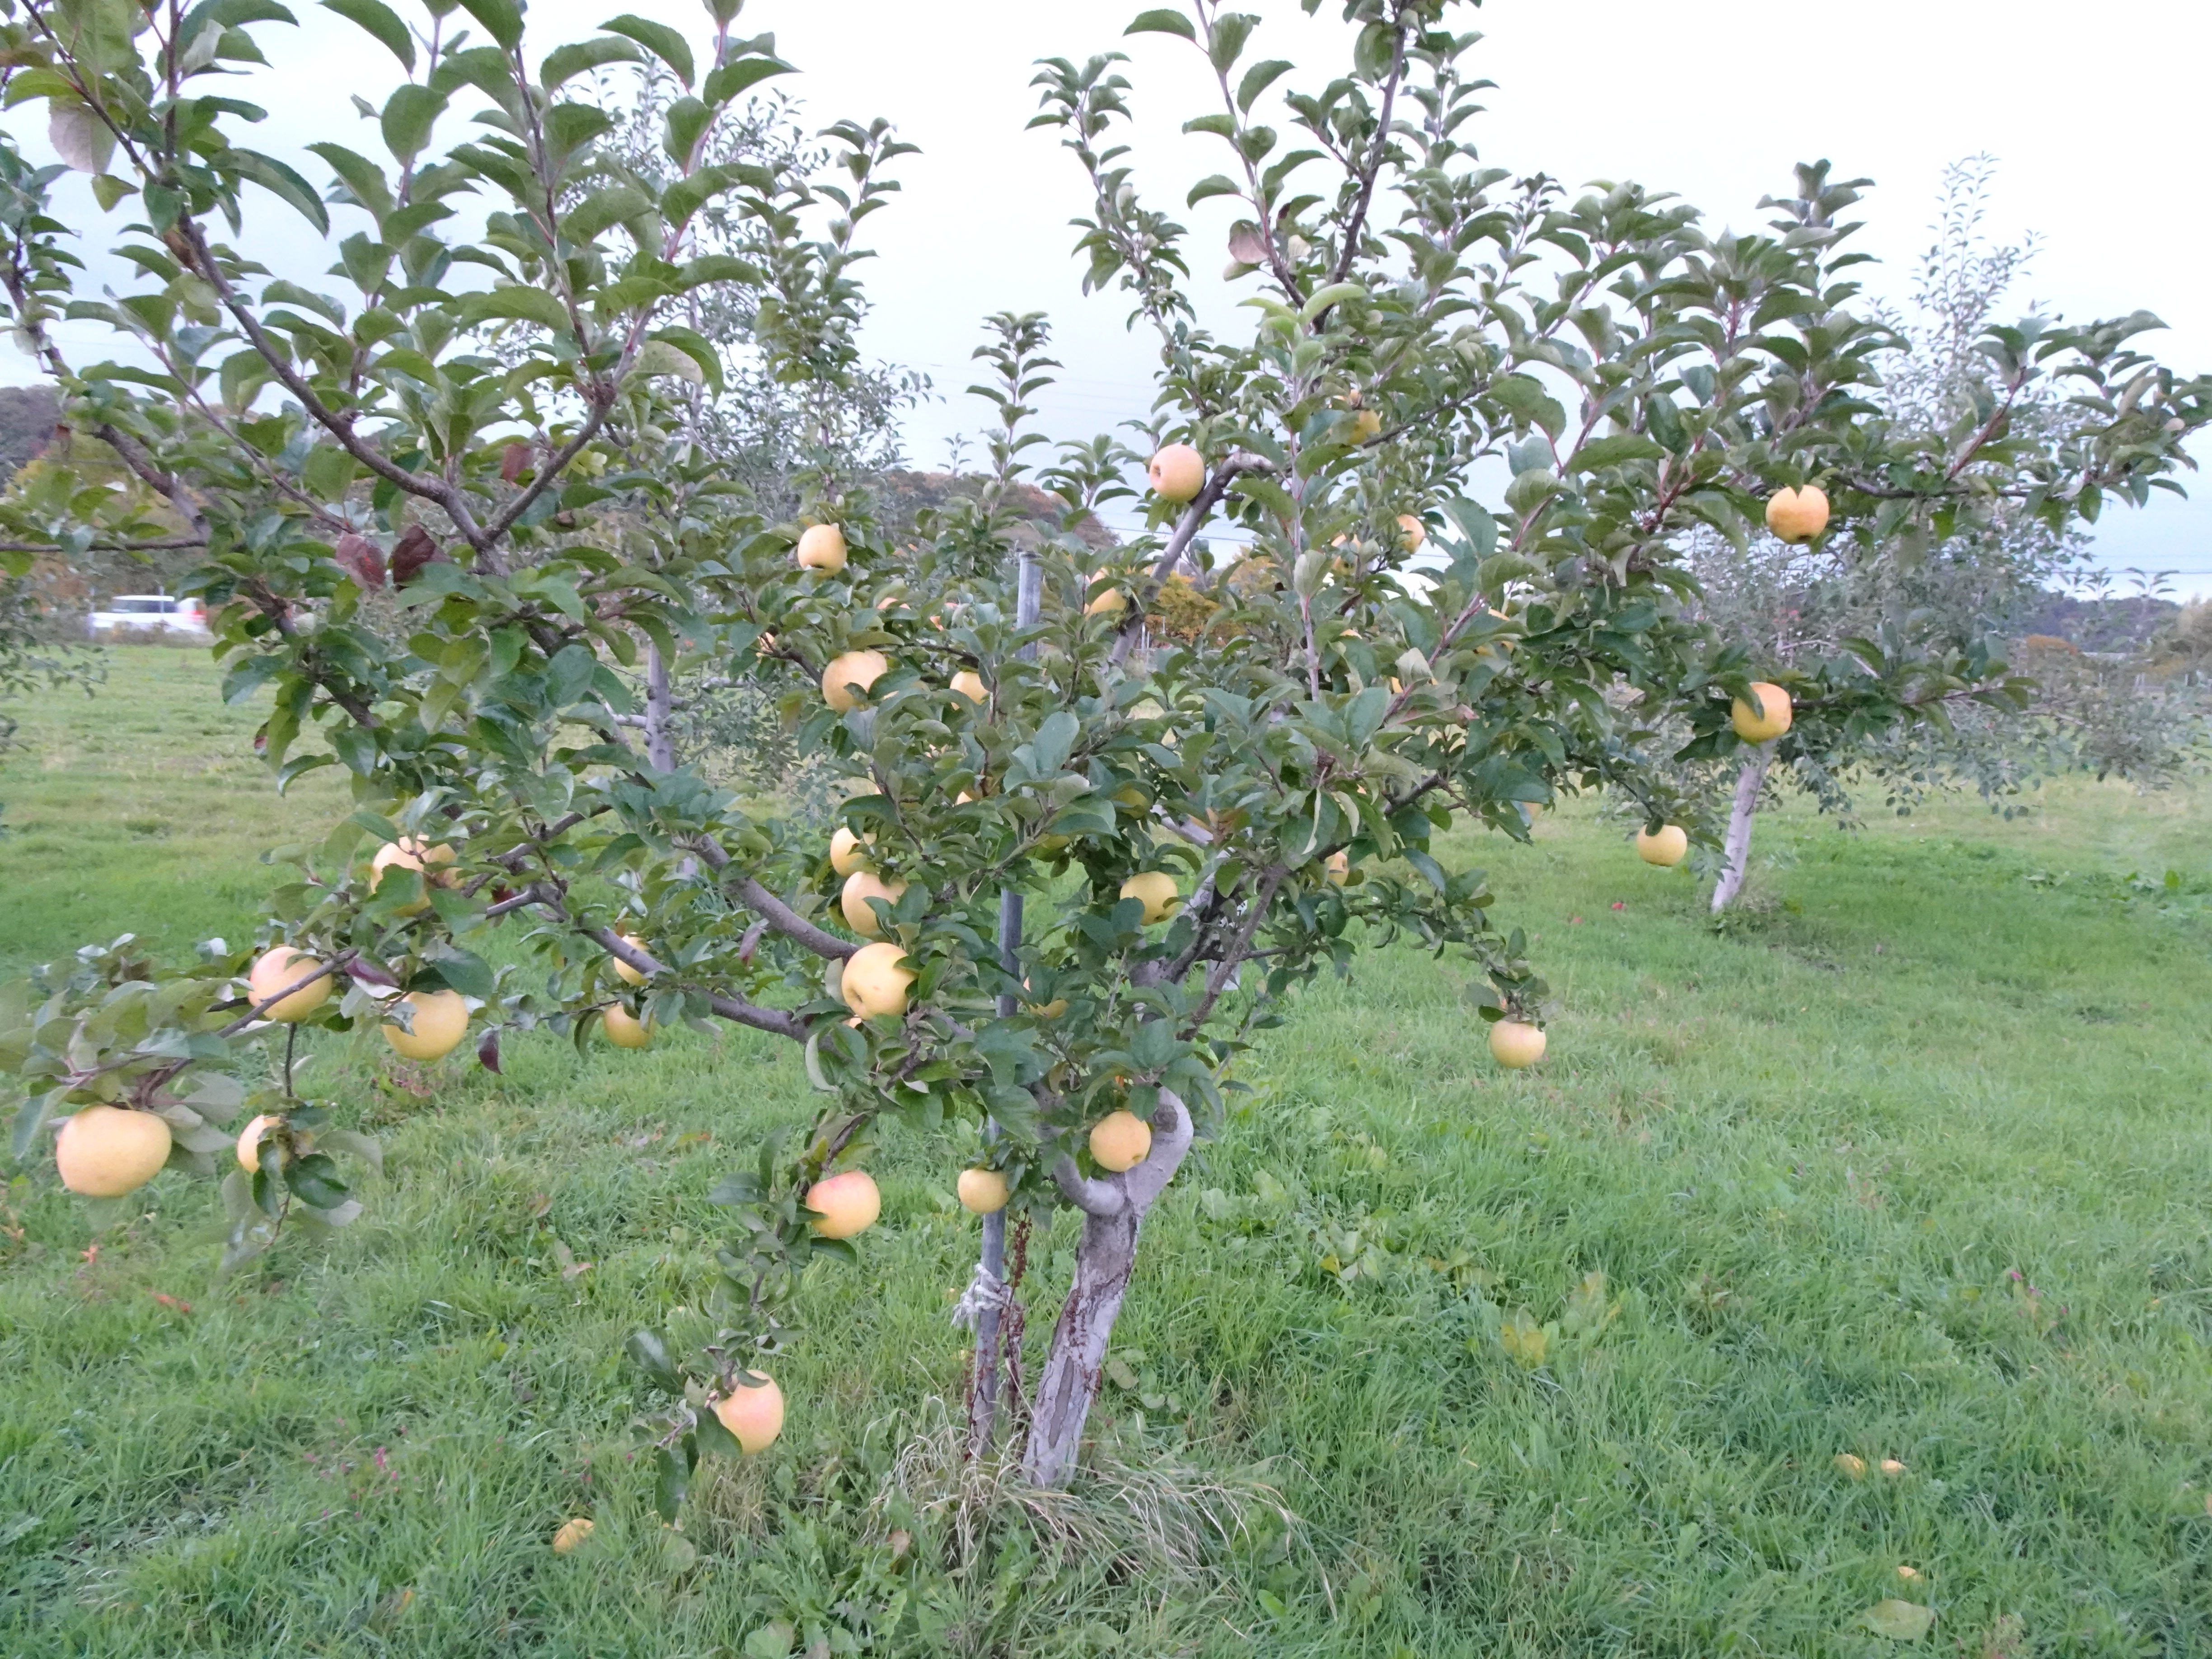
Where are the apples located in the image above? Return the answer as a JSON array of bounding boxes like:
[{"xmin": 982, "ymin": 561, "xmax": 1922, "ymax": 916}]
[
  {"xmin": 1464, "ymin": 606, "xmax": 1526, "ymax": 660},
  {"xmin": 820, "ymin": 647, "xmax": 891, "ymax": 716},
  {"xmin": 1388, "ymin": 673, "xmax": 1443, "ymax": 716},
  {"xmin": 699, "ymin": 1366, "xmax": 786, "ymax": 1454},
  {"xmin": 1089, "ymin": 569, "xmax": 1145, "ymax": 621},
  {"xmin": 1327, "ymin": 629, "xmax": 1363, "ymax": 672},
  {"xmin": 874, "ymin": 594, "xmax": 915, "ymax": 634},
  {"xmin": 842, "ymin": 869, "xmax": 912, "ymax": 940},
  {"xmin": 247, "ymin": 945, "xmax": 335, "ymax": 1025},
  {"xmin": 1019, "ymin": 965, "xmax": 1077, "ymax": 1023},
  {"xmin": 1108, "ymin": 777, "xmax": 1152, "ymax": 819},
  {"xmin": 1118, "ymin": 870, "xmax": 1178, "ymax": 929},
  {"xmin": 1489, "ymin": 1012, "xmax": 1548, "ymax": 1069},
  {"xmin": 1767, "ymin": 483, "xmax": 1831, "ymax": 544},
  {"xmin": 947, "ymin": 667, "xmax": 996, "ymax": 717},
  {"xmin": 1186, "ymin": 785, "xmax": 1229, "ymax": 834},
  {"xmin": 1328, "ymin": 532, "xmax": 1375, "ymax": 575},
  {"xmin": 955, "ymin": 1167, "xmax": 1016, "ymax": 1215},
  {"xmin": 1501, "ymin": 994, "xmax": 1530, "ymax": 1023},
  {"xmin": 919, "ymin": 601, "xmax": 973, "ymax": 652},
  {"xmin": 1089, "ymin": 1106, "xmax": 1154, "ymax": 1175},
  {"xmin": 830, "ymin": 824, "xmax": 896, "ymax": 879},
  {"xmin": 957, "ymin": 786, "xmax": 996, "ymax": 825},
  {"xmin": 796, "ymin": 523, "xmax": 848, "ymax": 578},
  {"xmin": 1035, "ymin": 811, "xmax": 1081, "ymax": 853},
  {"xmin": 1515, "ymin": 789, "xmax": 1546, "ymax": 821},
  {"xmin": 1635, "ymin": 821, "xmax": 1688, "ymax": 870},
  {"xmin": 370, "ymin": 833, "xmax": 466, "ymax": 919},
  {"xmin": 876, "ymin": 690, "xmax": 923, "ymax": 734},
  {"xmin": 840, "ymin": 943, "xmax": 929, "ymax": 1027},
  {"xmin": 749, "ymin": 622, "xmax": 784, "ymax": 662},
  {"xmin": 1324, "ymin": 392, "xmax": 1380, "ymax": 446},
  {"xmin": 1380, "ymin": 511, "xmax": 1425, "ymax": 557},
  {"xmin": 803, "ymin": 1169, "xmax": 885, "ymax": 1243},
  {"xmin": 611, "ymin": 928, "xmax": 662, "ymax": 986},
  {"xmin": 1148, "ymin": 441, "xmax": 1208, "ymax": 505},
  {"xmin": 1334, "ymin": 782, "xmax": 1368, "ymax": 817},
  {"xmin": 1307, "ymin": 850, "xmax": 1352, "ymax": 888},
  {"xmin": 926, "ymin": 735, "xmax": 963, "ymax": 772},
  {"xmin": 379, "ymin": 984, "xmax": 471, "ymax": 1063},
  {"xmin": 602, "ymin": 998, "xmax": 657, "ymax": 1050},
  {"xmin": 1730, "ymin": 679, "xmax": 1794, "ymax": 747},
  {"xmin": 54, "ymin": 1101, "xmax": 175, "ymax": 1199},
  {"xmin": 238, "ymin": 1109, "xmax": 317, "ymax": 1179}
]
